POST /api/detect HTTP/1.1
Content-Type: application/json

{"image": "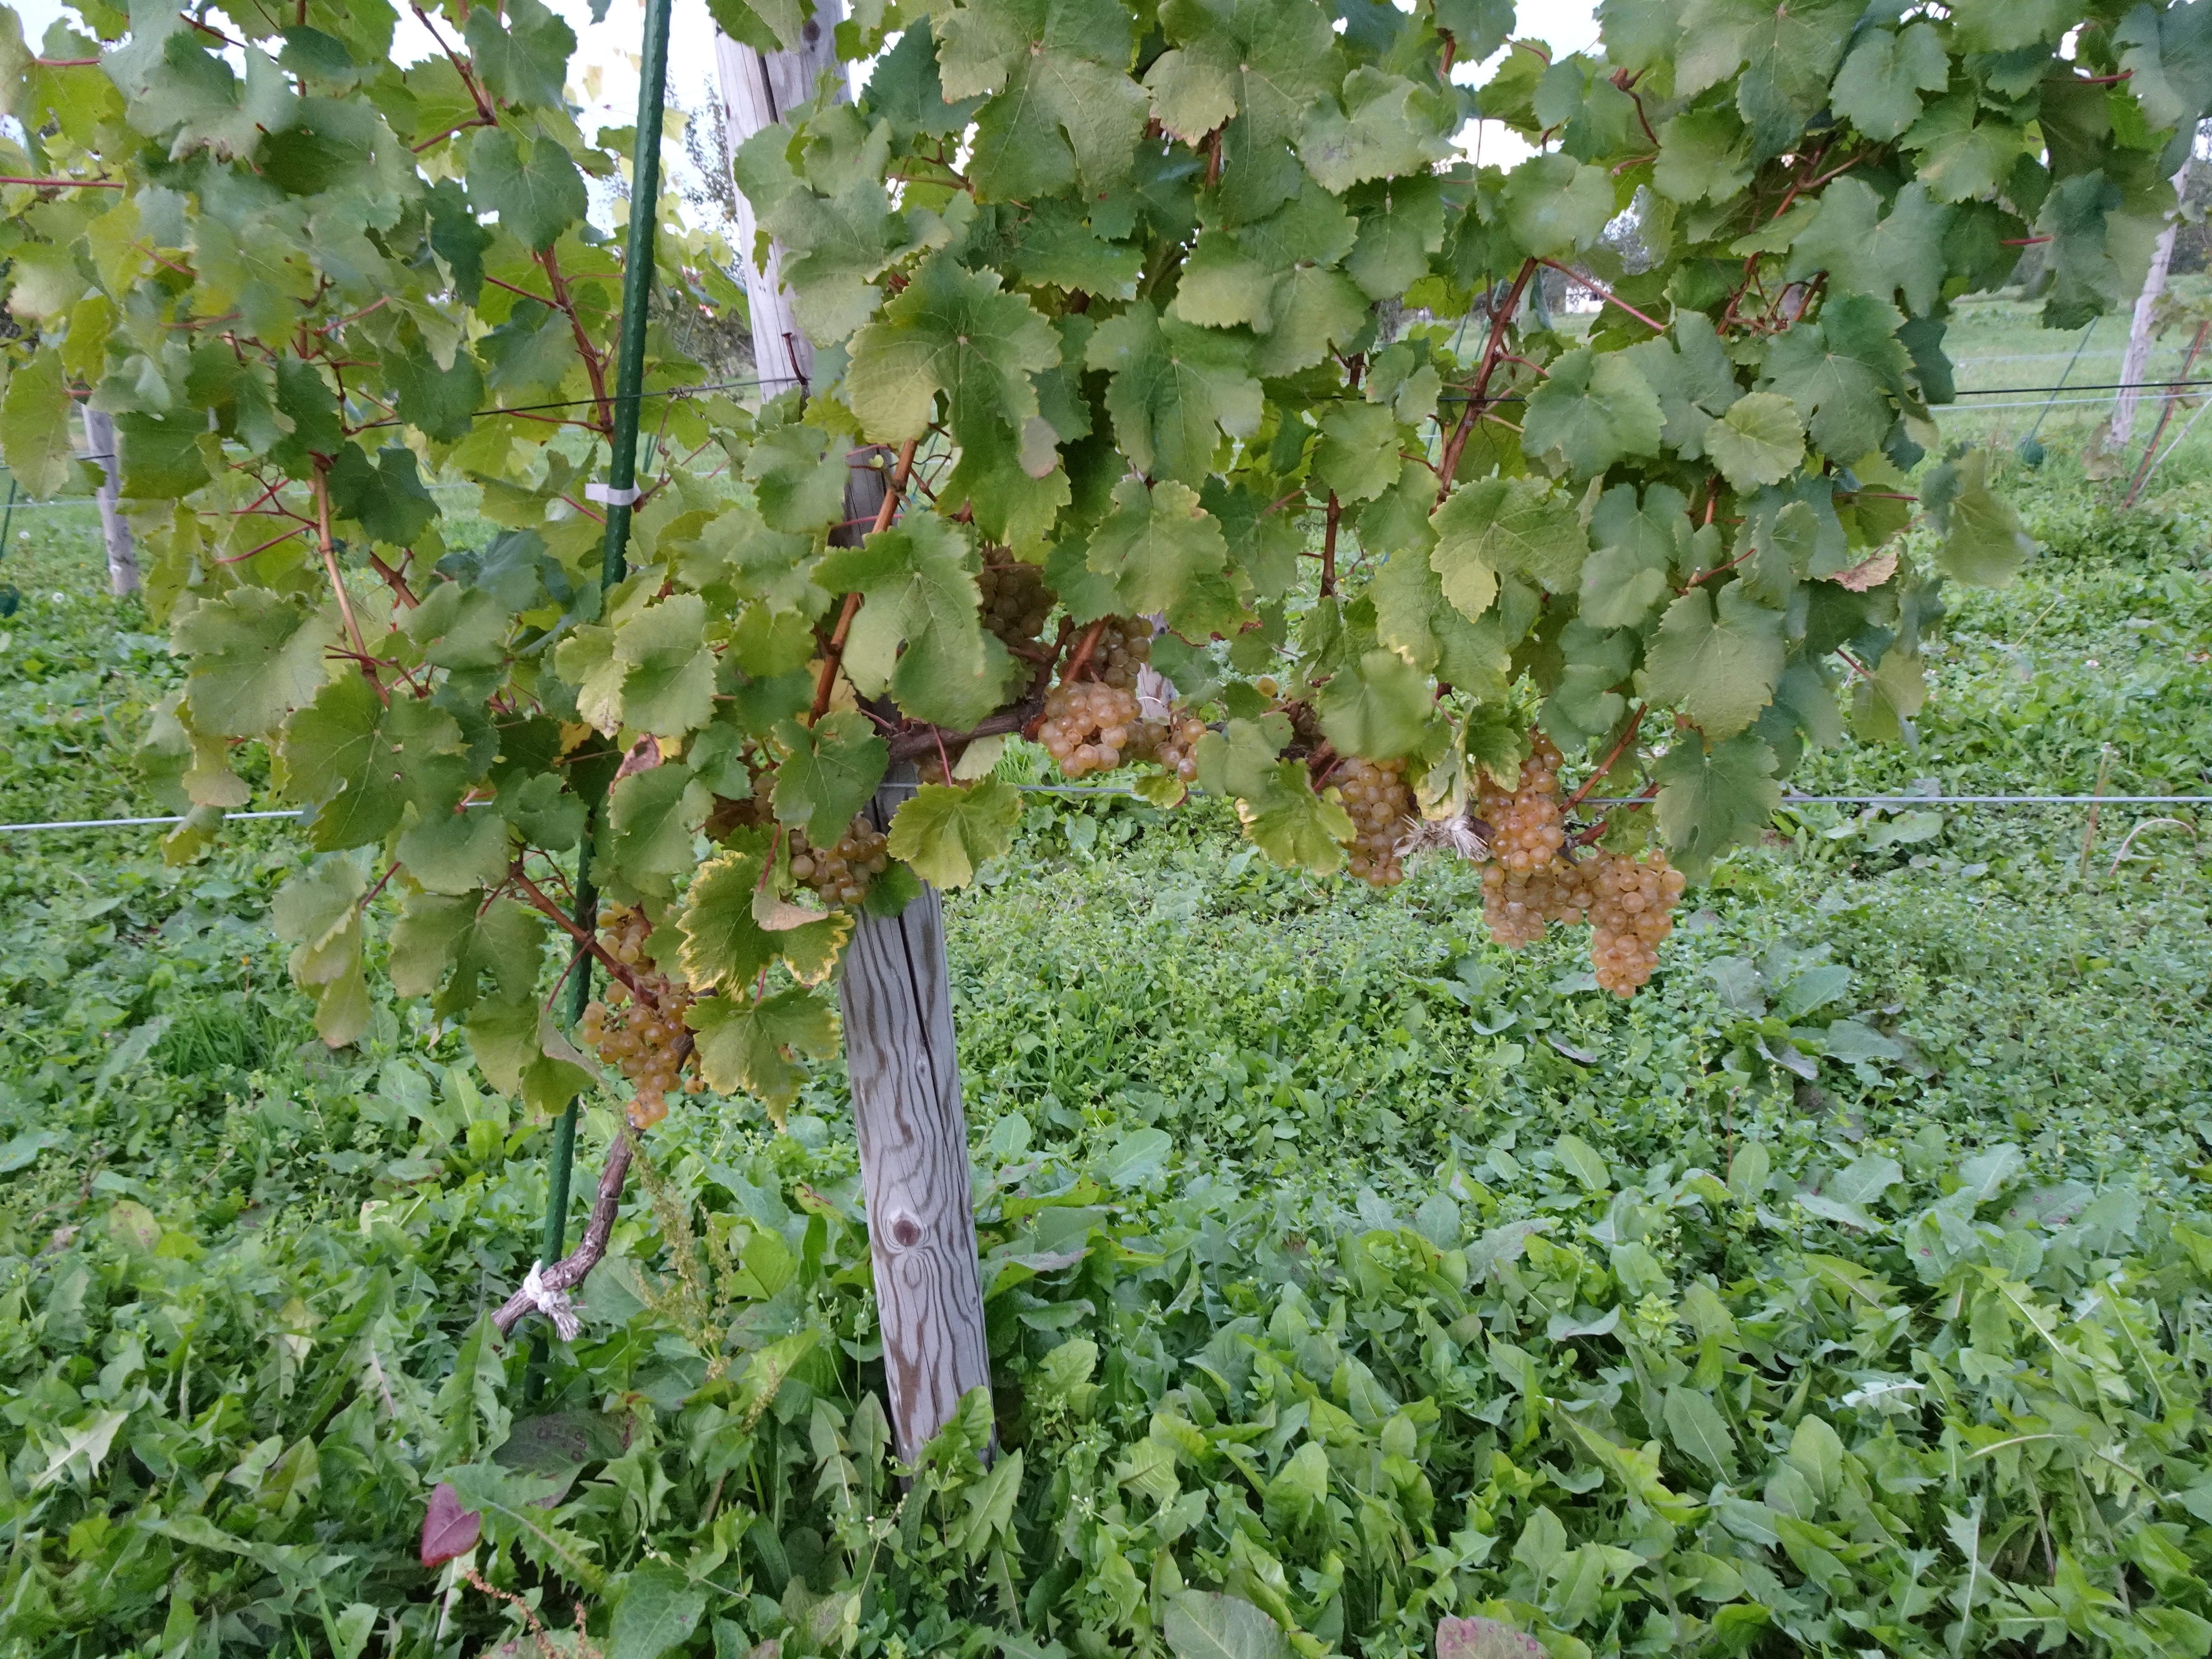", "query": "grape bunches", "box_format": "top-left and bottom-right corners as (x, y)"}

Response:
top-left (1118, 716), bottom-right (1166, 766)
top-left (1559, 849), bottom-right (1686, 998)
top-left (975, 546), bottom-right (1058, 660)
top-left (1159, 717), bottom-right (1206, 781)
top-left (595, 892), bottom-right (685, 995)
top-left (580, 982), bottom-right (687, 1131)
top-left (908, 737), bottom-right (974, 791)
top-left (1056, 612), bottom-right (1153, 698)
top-left (684, 1047), bottom-right (704, 1094)
top-left (754, 770), bottom-right (816, 881)
top-left (1327, 753), bottom-right (1418, 887)
top-left (1479, 858), bottom-right (1583, 950)
top-left (1037, 681), bottom-right (1141, 778)
top-left (1474, 728), bottom-right (1566, 879)
top-left (811, 814), bottom-right (886, 906)
top-left (1254, 675), bottom-right (1277, 699)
